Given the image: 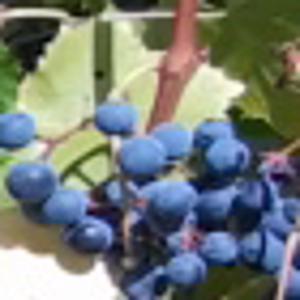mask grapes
Masks as SVG:
<instances>
[{
  "label": "grapes",
  "instance_id": "01657485",
  "mask_svg": "<svg viewBox=\"0 0 300 300\" xmlns=\"http://www.w3.org/2000/svg\"><path fill=\"white\" fill-rule=\"evenodd\" d=\"M99 136L124 138L100 199L62 188L43 160L7 169L4 189L37 226L59 229L66 250L115 259L127 300L209 281L211 270L236 263L279 274L282 300H300V199L289 196L297 160L260 152L240 138L228 114L198 120L192 131L161 123L141 137L129 101L92 108Z\"/></svg>",
  "mask_w": 300,
  "mask_h": 300
},
{
  "label": "grapes",
  "instance_id": "b958b902",
  "mask_svg": "<svg viewBox=\"0 0 300 300\" xmlns=\"http://www.w3.org/2000/svg\"><path fill=\"white\" fill-rule=\"evenodd\" d=\"M38 137V124L34 116L10 113L0 117V149L21 153L31 149Z\"/></svg>",
  "mask_w": 300,
  "mask_h": 300
}]
</instances>
